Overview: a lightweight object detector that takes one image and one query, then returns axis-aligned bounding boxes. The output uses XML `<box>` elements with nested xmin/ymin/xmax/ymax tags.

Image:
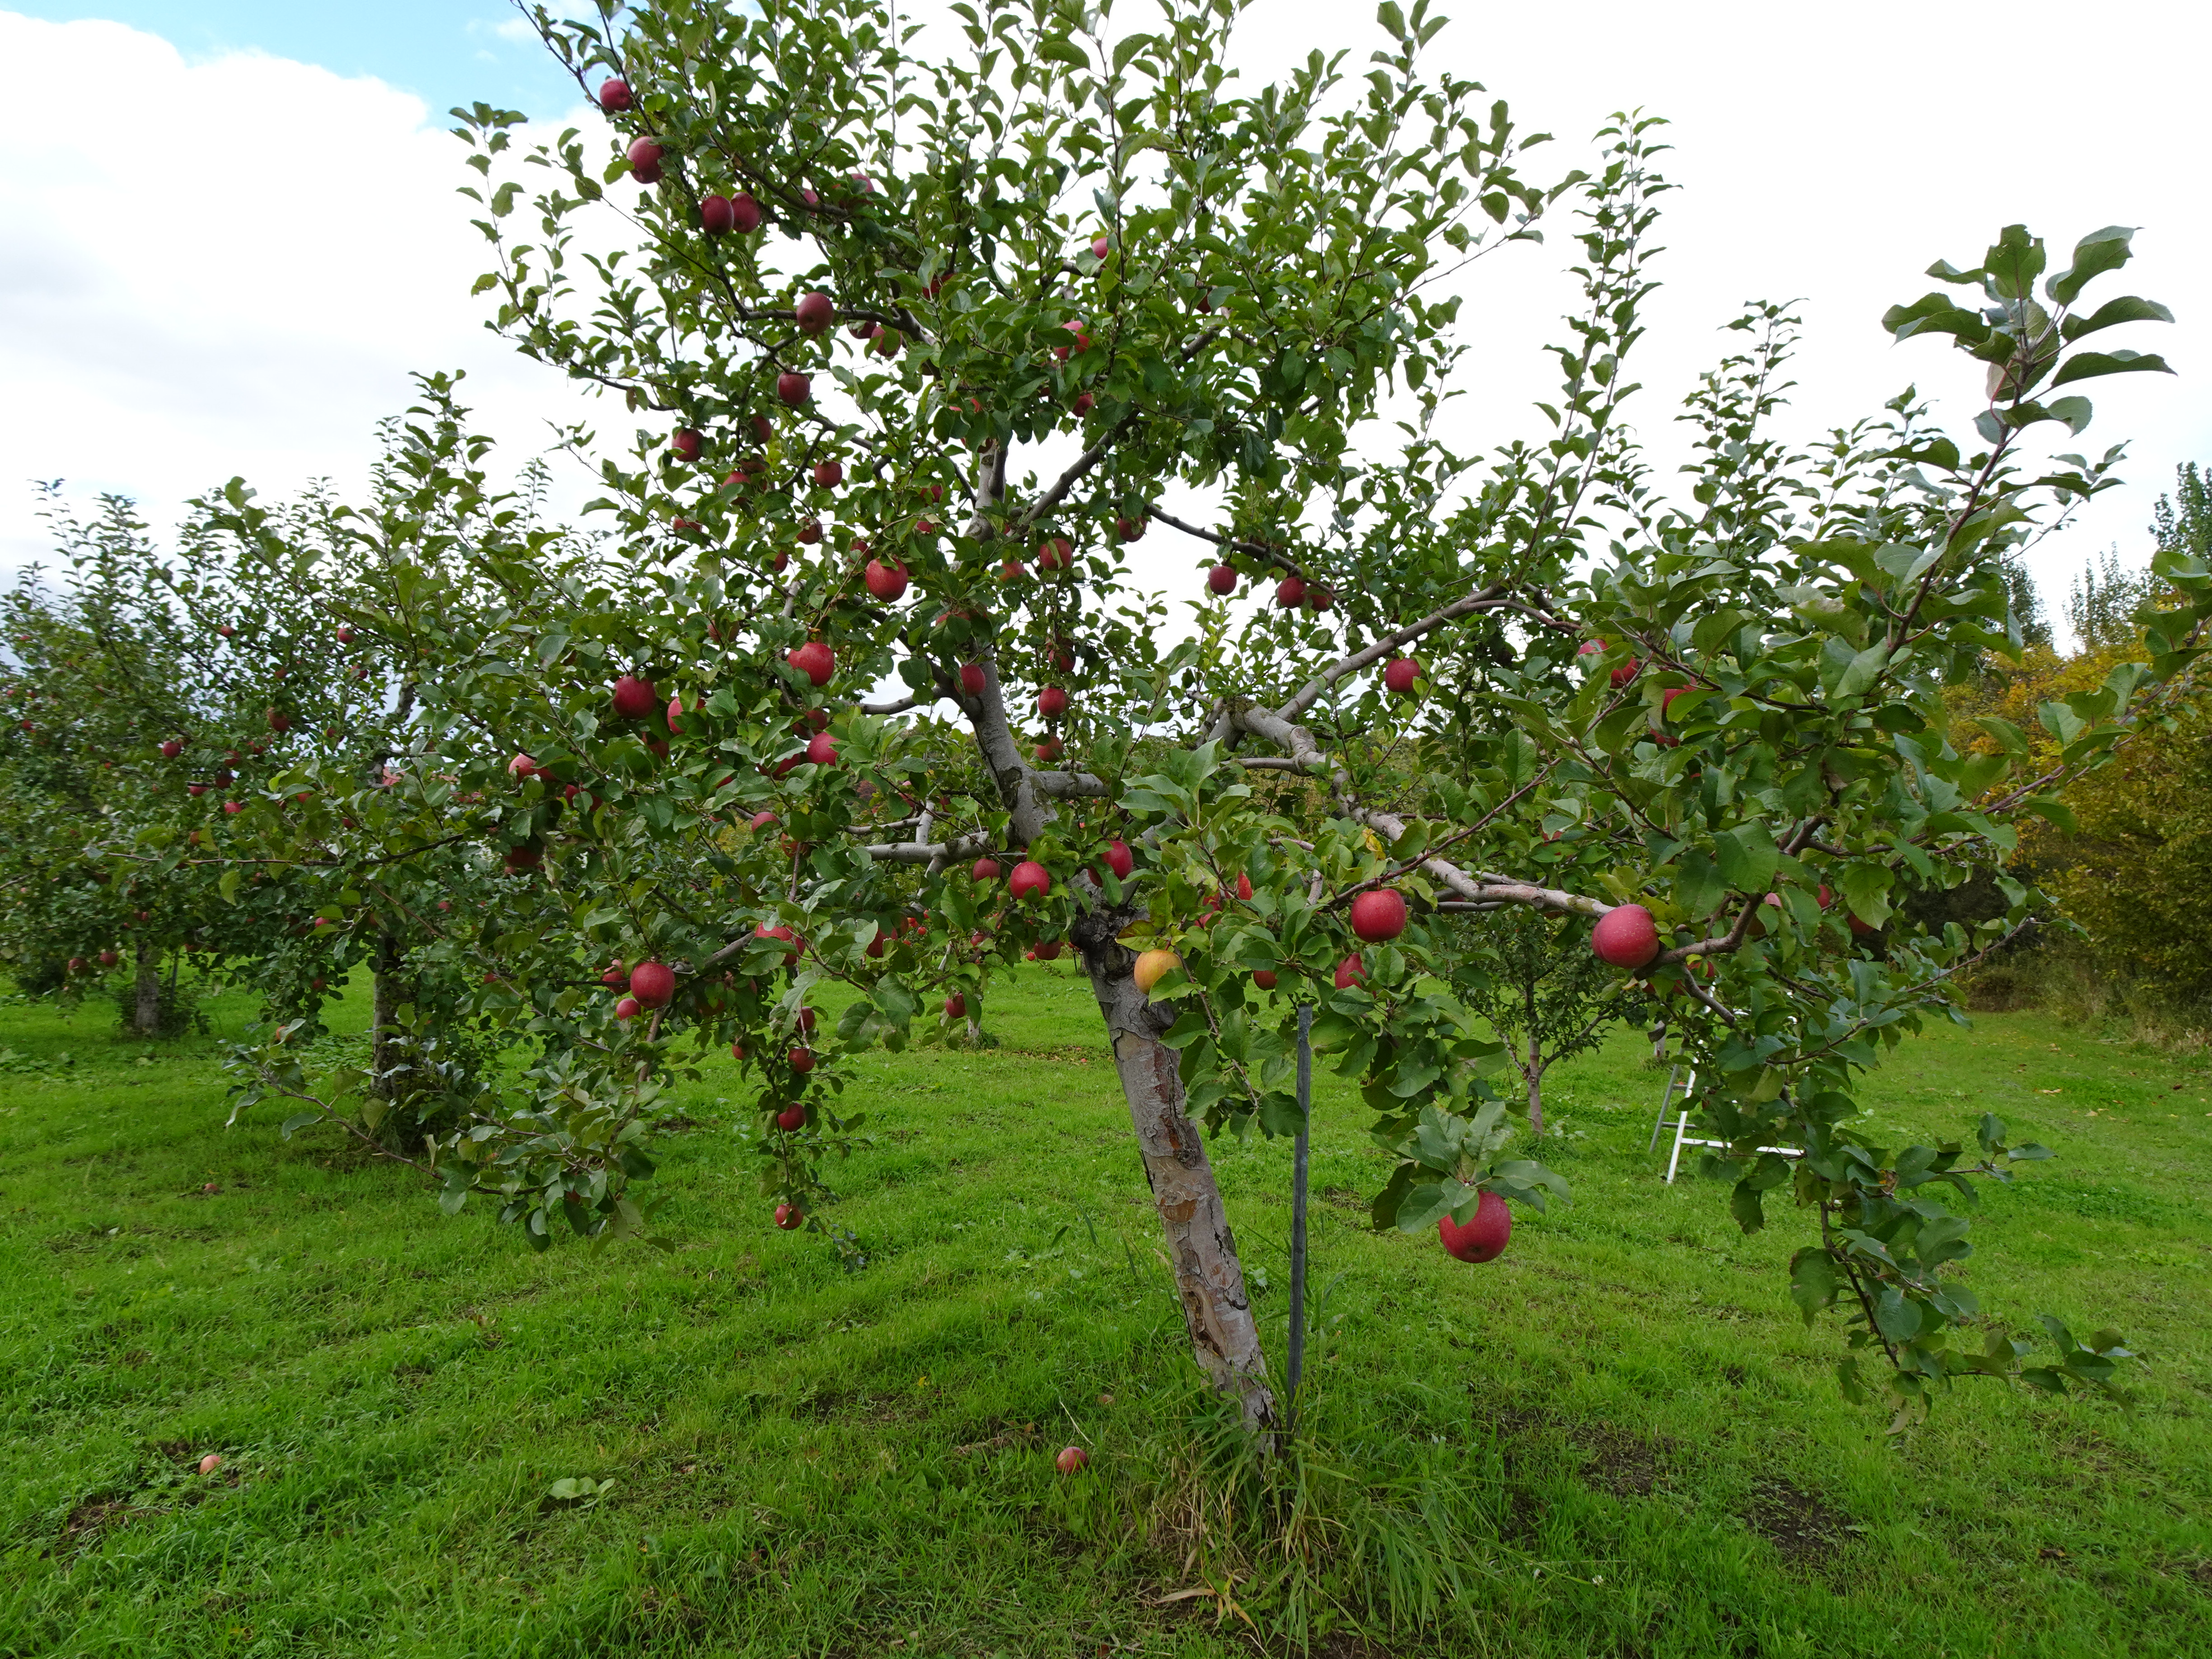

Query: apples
<box><xmin>1047</xmin><ymin>645</ymin><xmax>1081</xmax><ymax>677</ymax></box>
<box><xmin>808</xmin><ymin>727</ymin><xmax>853</xmax><ymax>770</ymax></box>
<box><xmin>952</xmin><ymin>664</ymin><xmax>988</xmax><ymax>700</ymax></box>
<box><xmin>1666</xmin><ymin>956</ymin><xmax>1718</xmax><ymax>996</ymax></box>
<box><xmin>1008</xmin><ymin>859</ymin><xmax>1052</xmax><ymax>903</ymax></box>
<box><xmin>251</xmin><ymin>871</ymin><xmax>270</xmax><ymax>889</ymax></box>
<box><xmin>936</xmin><ymin>608</ymin><xmax>971</xmax><ymax>644</ymax></box>
<box><xmin>970</xmin><ymin>930</ymin><xmax>993</xmax><ymax>950</ymax></box>
<box><xmin>467</xmin><ymin>898</ymin><xmax>504</xmax><ymax>939</ymax></box>
<box><xmin>1602</xmin><ymin>653</ymin><xmax>1642</xmax><ymax>690</ymax></box>
<box><xmin>343</xmin><ymin>813</ymin><xmax>362</xmax><ymax>832</ymax></box>
<box><xmin>865</xmin><ymin>553</ymin><xmax>910</xmax><ymax>605</ymax></box>
<box><xmin>708</xmin><ymin>613</ymin><xmax>741</xmax><ymax>646</ymax></box>
<box><xmin>796</xmin><ymin>291</ymin><xmax>836</xmax><ymax>338</ymax></box>
<box><xmin>507</xmin><ymin>749</ymin><xmax>559</xmax><ymax>796</ymax></box>
<box><xmin>185</xmin><ymin>933</ymin><xmax>205</xmax><ymax>954</ymax></box>
<box><xmin>566</xmin><ymin>776</ymin><xmax>608</xmax><ymax>815</ymax></box>
<box><xmin>631</xmin><ymin>960</ymin><xmax>675</xmax><ymax>1012</ymax></box>
<box><xmin>1245</xmin><ymin>484</ymin><xmax>1268</xmax><ymax>506</ymax></box>
<box><xmin>920</xmin><ymin>906</ymin><xmax>936</xmax><ymax>916</ymax></box>
<box><xmin>899</xmin><ymin>779</ymin><xmax>929</xmax><ymax>809</ymax></box>
<box><xmin>189</xmin><ymin>781</ymin><xmax>211</xmax><ymax>801</ymax></box>
<box><xmin>294</xmin><ymin>788</ymin><xmax>314</xmax><ymax>806</ymax></box>
<box><xmin>954</xmin><ymin>636</ymin><xmax>984</xmax><ymax>665</ymax></box>
<box><xmin>778</xmin><ymin>820</ymin><xmax>811</xmax><ymax>860</ymax></box>
<box><xmin>761</xmin><ymin>545</ymin><xmax>792</xmax><ymax>575</ymax></box>
<box><xmin>616</xmin><ymin>996</ymin><xmax>643</xmax><ymax>1029</ymax></box>
<box><xmin>1684</xmin><ymin>770</ymin><xmax>1724</xmax><ymax>803</ymax></box>
<box><xmin>312</xmin><ymin>915</ymin><xmax>335</xmax><ymax>931</ymax></box>
<box><xmin>833</xmin><ymin>530</ymin><xmax>872</xmax><ymax>570</ymax></box>
<box><xmin>484</xmin><ymin>972</ymin><xmax>502</xmax><ymax>991</ymax></box>
<box><xmin>794</xmin><ymin>513</ymin><xmax>823</xmax><ymax>545</ymax></box>
<box><xmin>1648</xmin><ymin>716</ymin><xmax>1682</xmax><ymax>754</ymax></box>
<box><xmin>221</xmin><ymin>746</ymin><xmax>242</xmax><ymax>768</ymax></box>
<box><xmin>914</xmin><ymin>513</ymin><xmax>947</xmax><ymax>541</ymax></box>
<box><xmin>249</xmin><ymin>738</ymin><xmax>267</xmax><ymax>755</ymax></box>
<box><xmin>432</xmin><ymin>899</ymin><xmax>451</xmax><ymax>918</ymax></box>
<box><xmin>1000</xmin><ymin>505</ymin><xmax>1032</xmax><ymax>542</ymax></box>
<box><xmin>1084</xmin><ymin>838</ymin><xmax>1134</xmax><ymax>887</ymax></box>
<box><xmin>272</xmin><ymin>664</ymin><xmax>290</xmax><ymax>680</ymax></box>
<box><xmin>1803</xmin><ymin>881</ymin><xmax>1832</xmax><ymax>913</ymax></box>
<box><xmin>269</xmin><ymin>701</ymin><xmax>296</xmax><ymax>734</ymax></box>
<box><xmin>1385</xmin><ymin>655</ymin><xmax>1422</xmax><ymax>696</ymax></box>
<box><xmin>1051</xmin><ymin>319</ymin><xmax>1105</xmax><ymax>365</ymax></box>
<box><xmin>638</xmin><ymin>722</ymin><xmax>682</xmax><ymax>765</ymax></box>
<box><xmin>1306</xmin><ymin>581</ymin><xmax>1340</xmax><ymax>612</ymax></box>
<box><xmin>336</xmin><ymin>626</ymin><xmax>359</xmax><ymax>646</ymax></box>
<box><xmin>221</xmin><ymin>802</ymin><xmax>241</xmax><ymax>825</ymax></box>
<box><xmin>609</xmin><ymin>672</ymin><xmax>658</xmax><ymax>723</ymax></box>
<box><xmin>92</xmin><ymin>862</ymin><xmax>112</xmax><ymax>884</ymax></box>
<box><xmin>951</xmin><ymin>388</ymin><xmax>998</xmax><ymax>422</ymax></box>
<box><xmin>599</xmin><ymin>76</ymin><xmax>636</xmax><ymax>117</ymax></box>
<box><xmin>1036</xmin><ymin>687</ymin><xmax>1072</xmax><ymax>721</ymax></box>
<box><xmin>1211</xmin><ymin>865</ymin><xmax>1253</xmax><ymax>915</ymax></box>
<box><xmin>813</xmin><ymin>457</ymin><xmax>844</xmax><ymax>488</ymax></box>
<box><xmin>789</xmin><ymin>640</ymin><xmax>836</xmax><ymax>689</ymax></box>
<box><xmin>960</xmin><ymin>417</ymin><xmax>993</xmax><ymax>455</ymax></box>
<box><xmin>1043</xmin><ymin>539</ymin><xmax>1074</xmax><ymax>574</ymax></box>
<box><xmin>1436</xmin><ymin>885</ymin><xmax>1466</xmax><ymax>913</ymax></box>
<box><xmin>1199</xmin><ymin>893</ymin><xmax>1228</xmax><ymax>917</ymax></box>
<box><xmin>1255</xmin><ymin>527</ymin><xmax>1287</xmax><ymax>556</ymax></box>
<box><xmin>919</xmin><ymin>925</ymin><xmax>928</xmax><ymax>941</ymax></box>
<box><xmin>1197</xmin><ymin>909</ymin><xmax>1235</xmax><ymax>939</ymax></box>
<box><xmin>905</xmin><ymin>916</ymin><xmax>918</xmax><ymax>929</ymax></box>
<box><xmin>742</xmin><ymin>414</ymin><xmax>776</xmax><ymax>446</ymax></box>
<box><xmin>717</xmin><ymin>467</ymin><xmax>754</xmax><ymax>507</ymax></box>
<box><xmin>349</xmin><ymin>663</ymin><xmax>370</xmax><ymax>681</ymax></box>
<box><xmin>698</xmin><ymin>191</ymin><xmax>736</xmax><ymax>239</ymax></box>
<box><xmin>871</xmin><ymin>804</ymin><xmax>889</xmax><ymax>821</ymax></box>
<box><xmin>138</xmin><ymin>910</ymin><xmax>150</xmax><ymax>922</ymax></box>
<box><xmin>1093</xmin><ymin>234</ymin><xmax>1136</xmax><ymax>274</ymax></box>
<box><xmin>1278</xmin><ymin>575</ymin><xmax>1310</xmax><ymax>610</ymax></box>
<box><xmin>1070</xmin><ymin>384</ymin><xmax>1102</xmax><ymax>418</ymax></box>
<box><xmin>827</xmin><ymin>172</ymin><xmax>875</xmax><ymax>223</ymax></box>
<box><xmin>872</xmin><ymin>322</ymin><xmax>903</xmax><ymax>359</ymax></box>
<box><xmin>1252</xmin><ymin>954</ymin><xmax>1290</xmax><ymax>992</ymax></box>
<box><xmin>1088</xmin><ymin>794</ymin><xmax>1103</xmax><ymax>805</ymax></box>
<box><xmin>775</xmin><ymin>1202</ymin><xmax>805</xmax><ymax>1231</ymax></box>
<box><xmin>938</xmin><ymin>794</ymin><xmax>958</xmax><ymax>809</ymax></box>
<box><xmin>149</xmin><ymin>780</ymin><xmax>164</xmax><ymax>793</ymax></box>
<box><xmin>1114</xmin><ymin>508</ymin><xmax>1150</xmax><ymax>545</ymax></box>
<box><xmin>1207</xmin><ymin>565</ymin><xmax>1240</xmax><ymax>596</ymax></box>
<box><xmin>1037</xmin><ymin>732</ymin><xmax>1068</xmax><ymax>763</ymax></box>
<box><xmin>1024</xmin><ymin>949</ymin><xmax>1038</xmax><ymax>964</ymax></box>
<box><xmin>730</xmin><ymin>1035</ymin><xmax>760</xmax><ymax>1063</ymax></box>
<box><xmin>776</xmin><ymin>1099</ymin><xmax>810</xmax><ymax>1134</ymax></box>
<box><xmin>1348</xmin><ymin>887</ymin><xmax>1407</xmax><ymax>945</ymax></box>
<box><xmin>161</xmin><ymin>734</ymin><xmax>184</xmax><ymax>761</ymax></box>
<box><xmin>294</xmin><ymin>656</ymin><xmax>311</xmax><ymax>674</ymax></box>
<box><xmin>944</xmin><ymin>991</ymin><xmax>970</xmax><ymax>1020</ymax></box>
<box><xmin>730</xmin><ymin>189</ymin><xmax>763</xmax><ymax>237</ymax></box>
<box><xmin>749</xmin><ymin>809</ymin><xmax>784</xmax><ymax>843</ymax></box>
<box><xmin>790</xmin><ymin>708</ymin><xmax>829</xmax><ymax>741</ymax></box>
<box><xmin>242</xmin><ymin>910</ymin><xmax>261</xmax><ymax>928</ymax></box>
<box><xmin>1542</xmin><ymin>822</ymin><xmax>1576</xmax><ymax>856</ymax></box>
<box><xmin>221</xmin><ymin>623</ymin><xmax>237</xmax><ymax>639</ymax></box>
<box><xmin>756</xmin><ymin>736</ymin><xmax>803</xmax><ymax>782</ymax></box>
<box><xmin>627</xmin><ymin>132</ymin><xmax>673</xmax><ymax>184</ymax></box>
<box><xmin>562</xmin><ymin>1171</ymin><xmax>596</xmax><ymax>1204</ymax></box>
<box><xmin>701</xmin><ymin>969</ymin><xmax>734</xmax><ymax>1007</ymax></box>
<box><xmin>784</xmin><ymin>1044</ymin><xmax>817</xmax><ymax>1076</ymax></box>
<box><xmin>972</xmin><ymin>856</ymin><xmax>1003</xmax><ymax>884</ymax></box>
<box><xmin>774</xmin><ymin>367</ymin><xmax>812</xmax><ymax>407</ymax></box>
<box><xmin>1639</xmin><ymin>958</ymin><xmax>1686</xmax><ymax>1000</ymax></box>
<box><xmin>420</xmin><ymin>647</ymin><xmax>434</xmax><ymax>662</ymax></box>
<box><xmin>188</xmin><ymin>828</ymin><xmax>208</xmax><ymax>848</ymax></box>
<box><xmin>1032</xmin><ymin>929</ymin><xmax>1063</xmax><ymax>962</ymax></box>
<box><xmin>1076</xmin><ymin>820</ymin><xmax>1092</xmax><ymax>840</ymax></box>
<box><xmin>64</xmin><ymin>954</ymin><xmax>89</xmax><ymax>980</ymax></box>
<box><xmin>755</xmin><ymin>915</ymin><xmax>808</xmax><ymax>969</ymax></box>
<box><xmin>785</xmin><ymin>182</ymin><xmax>823</xmax><ymax>224</ymax></box>
<box><xmin>105</xmin><ymin>759</ymin><xmax>119</xmax><ymax>775</ymax></box>
<box><xmin>1332</xmin><ymin>950</ymin><xmax>1384</xmax><ymax>1006</ymax></box>
<box><xmin>1727</xmin><ymin>888</ymin><xmax>1786</xmax><ymax>936</ymax></box>
<box><xmin>845</xmin><ymin>306</ymin><xmax>877</xmax><ymax>338</ymax></box>
<box><xmin>367</xmin><ymin>907</ymin><xmax>392</xmax><ymax>932</ymax></box>
<box><xmin>308</xmin><ymin>973</ymin><xmax>327</xmax><ymax>993</ymax></box>
<box><xmin>668</xmin><ymin>690</ymin><xmax>715</xmax><ymax>741</ymax></box>
<box><xmin>674</xmin><ymin>507</ymin><xmax>705</xmax><ymax>540</ymax></box>
<box><xmin>1190</xmin><ymin>283</ymin><xmax>1220</xmax><ymax>314</ymax></box>
<box><xmin>498</xmin><ymin>826</ymin><xmax>547</xmax><ymax>869</ymax></box>
<box><xmin>921</xmin><ymin>270</ymin><xmax>965</xmax><ymax>310</ymax></box>
<box><xmin>711</xmin><ymin>755</ymin><xmax>747</xmax><ymax>792</ymax></box>
<box><xmin>276</xmin><ymin>1024</ymin><xmax>293</xmax><ymax>1041</ymax></box>
<box><xmin>909</xmin><ymin>474</ymin><xmax>948</xmax><ymax>516</ymax></box>
<box><xmin>326</xmin><ymin>725</ymin><xmax>346</xmax><ymax>743</ymax></box>
<box><xmin>673</xmin><ymin>425</ymin><xmax>704</xmax><ymax>464</ymax></box>
<box><xmin>1134</xmin><ymin>949</ymin><xmax>1186</xmax><ymax>1002</ymax></box>
<box><xmin>446</xmin><ymin>785</ymin><xmax>489</xmax><ymax>827</ymax></box>
<box><xmin>592</xmin><ymin>957</ymin><xmax>626</xmax><ymax>989</ymax></box>
<box><xmin>864</xmin><ymin>916</ymin><xmax>897</xmax><ymax>958</ymax></box>
<box><xmin>994</xmin><ymin>554</ymin><xmax>1028</xmax><ymax>588</ymax></box>
<box><xmin>708</xmin><ymin>814</ymin><xmax>724</xmax><ymax>830</ymax></box>
<box><xmin>1646</xmin><ymin>661</ymin><xmax>1699</xmax><ymax>723</ymax></box>
<box><xmin>787</xmin><ymin>1006</ymin><xmax>817</xmax><ymax>1034</ymax></box>
<box><xmin>1436</xmin><ymin>1183</ymin><xmax>1513</xmax><ymax>1265</ymax></box>
<box><xmin>101</xmin><ymin>948</ymin><xmax>120</xmax><ymax>967</ymax></box>
<box><xmin>1574</xmin><ymin>636</ymin><xmax>1617</xmax><ymax>676</ymax></box>
<box><xmin>1592</xmin><ymin>903</ymin><xmax>1664</xmax><ymax>972</ymax></box>
<box><xmin>505</xmin><ymin>865</ymin><xmax>547</xmax><ymax>893</ymax></box>
<box><xmin>1842</xmin><ymin>897</ymin><xmax>1879</xmax><ymax>939</ymax></box>
<box><xmin>731</xmin><ymin>455</ymin><xmax>774</xmax><ymax>498</ymax></box>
